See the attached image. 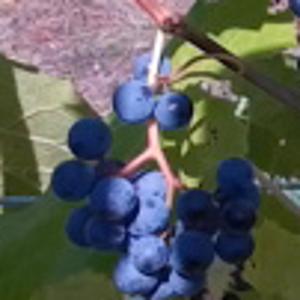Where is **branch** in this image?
Segmentation results:
<instances>
[{"label": "branch", "instance_id": "1", "mask_svg": "<svg viewBox=\"0 0 300 300\" xmlns=\"http://www.w3.org/2000/svg\"><path fill=\"white\" fill-rule=\"evenodd\" d=\"M137 3L147 11L157 27L164 32H172L202 48L210 57L227 70L237 72L249 83L267 91L275 100L282 104H290L300 109V94L285 86H277L265 78L237 54L231 53L220 44L207 39L196 32L190 25L173 15L170 11L156 4L154 0H137Z\"/></svg>", "mask_w": 300, "mask_h": 300}]
</instances>
